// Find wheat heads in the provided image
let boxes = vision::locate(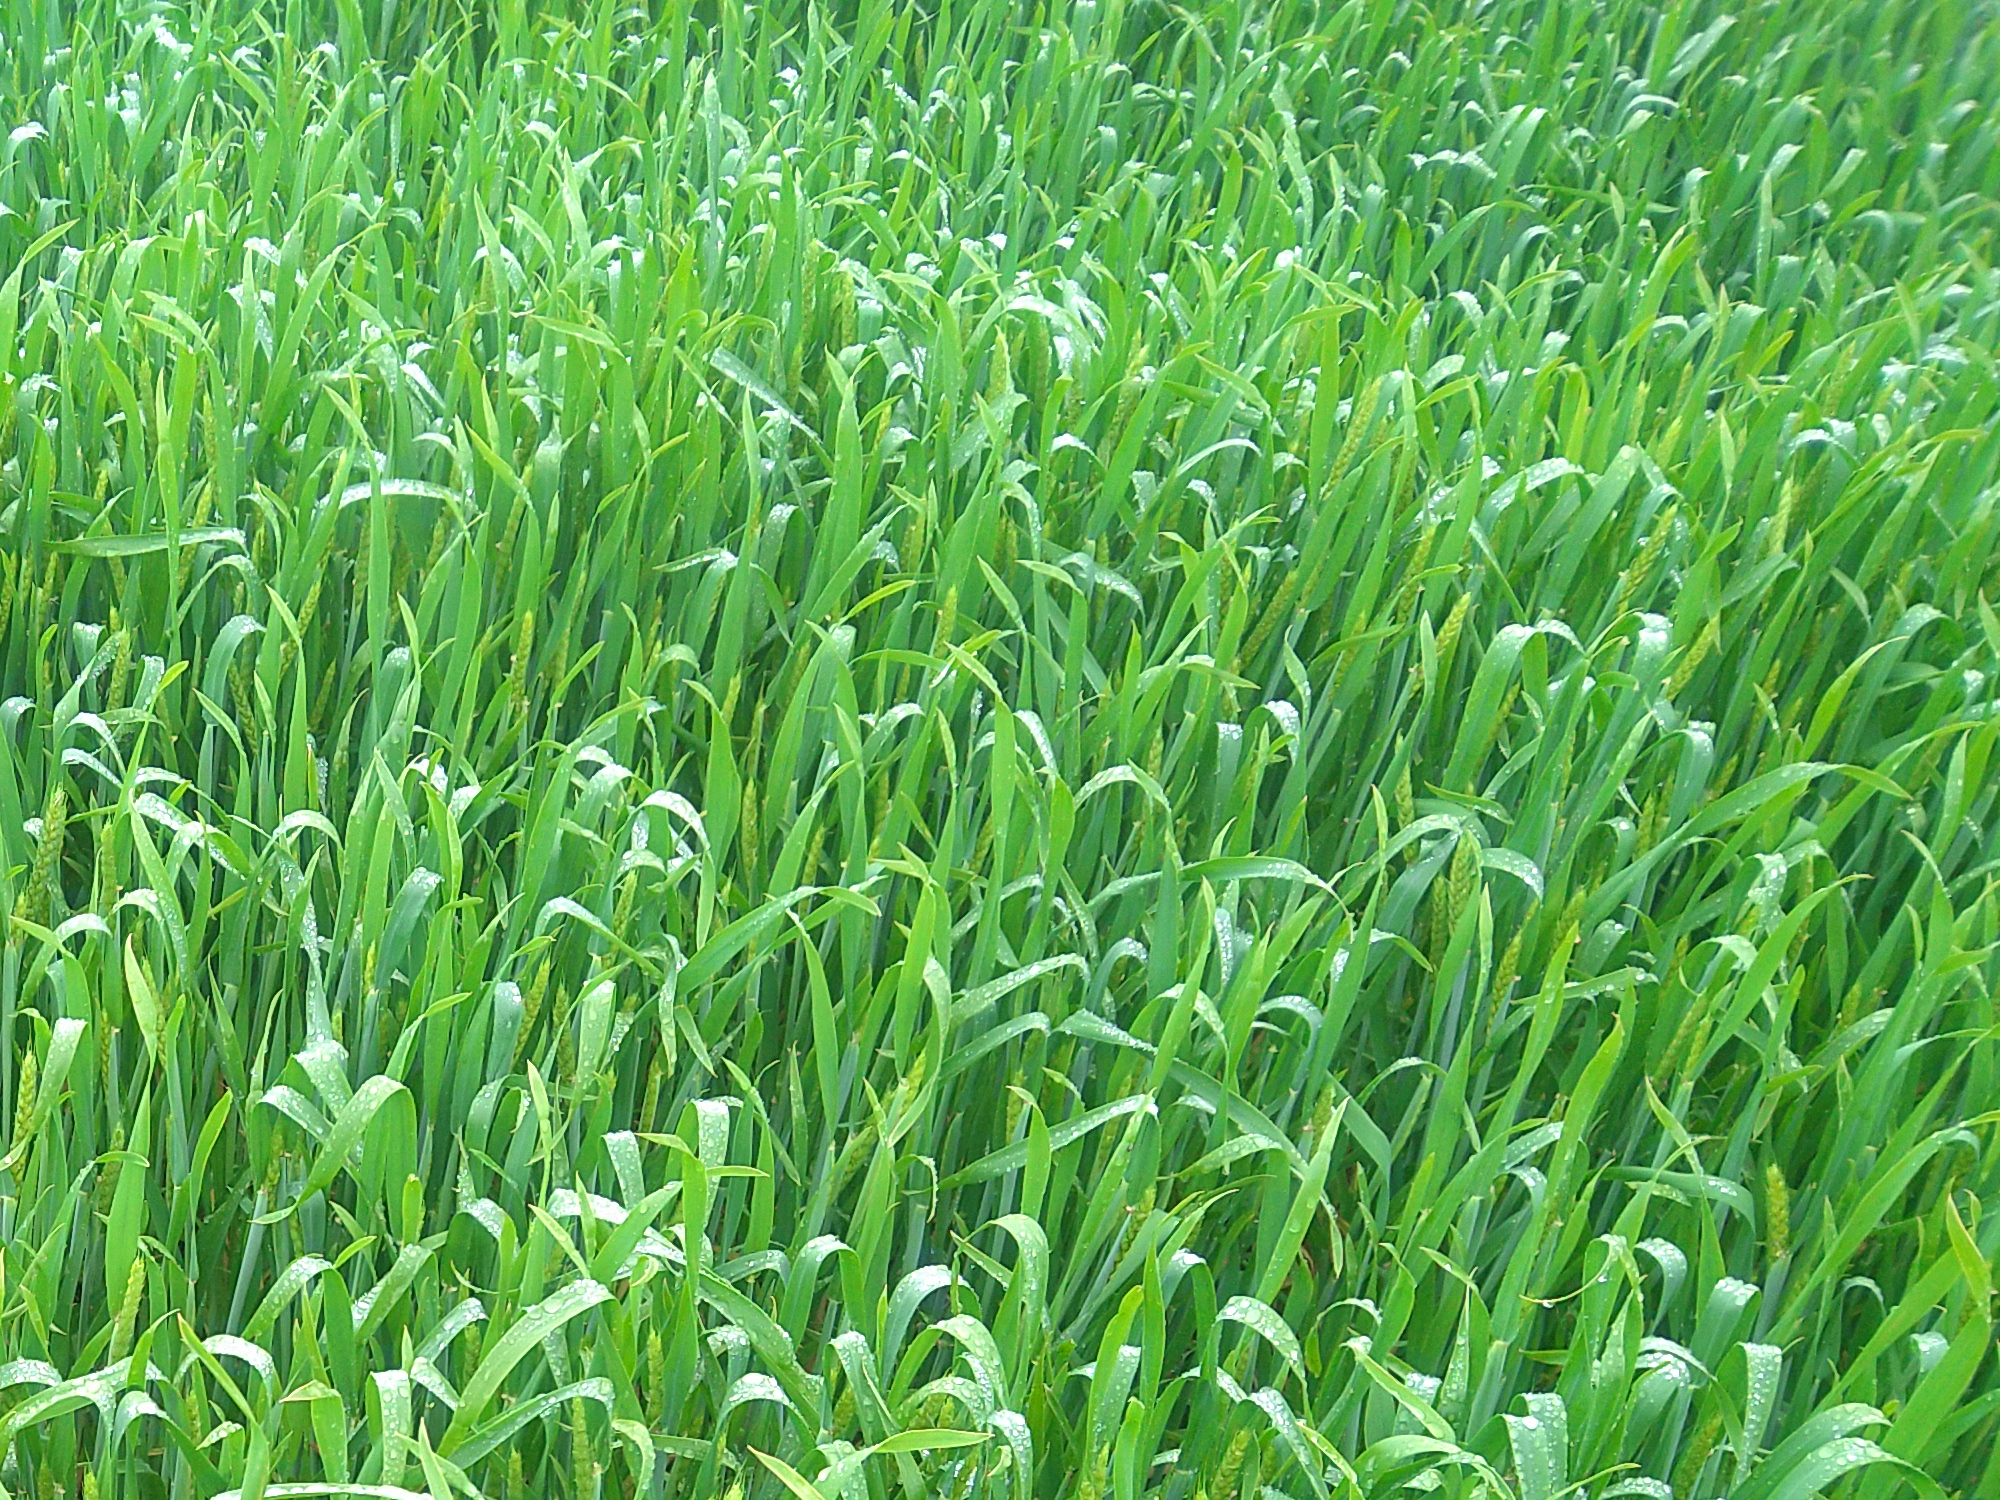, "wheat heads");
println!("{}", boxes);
[202,392,218,489]
[1027,312,1046,390]
[282,585,320,665]
[747,706,766,772]
[100,1011,114,1086]
[780,586,790,604]
[844,273,856,349]
[1227,111,1234,128]
[778,641,810,724]
[675,1410,702,1482]
[1764,1165,1789,1256]
[1346,677,1375,755]
[109,1254,146,1362]
[1098,1071,1133,1171]
[310,658,334,730]
[1712,753,1737,799]
[1449,831,1471,936]
[1671,1413,1724,1500]
[546,1241,565,1286]
[0,405,17,457]
[1736,428,1748,456]
[1653,772,1673,838]
[280,468,293,519]
[395,999,407,1021]
[334,1010,342,1040]
[807,114,823,156]
[92,1121,120,1209]
[1822,346,1852,415]
[227,660,257,747]
[1313,1079,1335,1157]
[46,452,58,491]
[1619,503,1678,601]
[19,550,33,603]
[9,1045,36,1172]
[1397,527,1432,622]
[1590,873,1602,896]
[507,961,548,1051]
[1770,478,1792,553]
[1174,415,1185,445]
[112,171,120,205]
[1521,895,1538,930]
[1784,916,1808,963]
[145,82,151,99]
[555,984,575,1078]
[387,555,413,621]
[1006,1073,1024,1131]
[806,1083,818,1117]
[38,1454,54,1500]
[937,77,952,138]
[1680,1018,1711,1082]
[1199,195,1211,222]
[671,659,679,691]
[176,484,217,593]
[1829,712,1855,763]
[102,521,126,597]
[715,1482,742,1500]
[1491,933,1520,1021]
[935,587,961,658]
[1548,890,1586,956]
[264,1130,285,1203]
[1715,83,1728,111]
[645,1329,667,1418]
[871,404,893,452]
[1748,659,1779,743]
[1586,515,1613,560]
[1034,332,1051,409]
[138,360,159,456]
[1189,180,1200,219]
[1320,587,1332,634]
[13,58,22,95]
[1812,612,1824,654]
[1668,617,1717,698]
[801,238,818,309]
[481,258,494,305]
[307,235,319,271]
[560,37,581,88]
[1872,380,1896,413]
[377,1014,387,1073]
[29,788,60,926]
[519,414,536,463]
[1406,593,1470,698]
[823,1092,894,1204]
[1397,444,1419,519]
[1116,1184,1152,1267]
[644,640,662,677]
[1782,1272,1807,1318]
[0,547,17,640]
[186,1389,203,1444]
[1658,418,1685,466]
[1425,878,1448,988]
[1567,576,1589,609]
[787,341,804,397]
[103,825,117,924]
[288,1202,303,1253]
[1910,729,1953,791]
[1006,526,1020,577]
[718,673,739,719]
[915,41,924,80]
[1208,1427,1251,1500]
[1230,1339,1252,1383]
[1651,989,1707,1084]
[1426,170,1443,207]
[1369,418,1387,451]
[1615,467,1648,539]
[1470,681,1520,781]
[1791,455,1828,524]
[1214,541,1239,643]
[833,1380,862,1439]
[365,938,381,990]
[1241,570,1298,666]
[9,895,28,949]
[1067,354,1084,426]
[41,657,51,700]
[39,548,57,630]
[899,1052,925,1117]
[508,1445,525,1500]
[1040,1050,1064,1108]
[651,596,663,617]
[1887,565,1914,620]
[586,301,594,320]
[749,936,757,959]
[1756,698,1802,774]
[1531,1102,1565,1167]
[758,225,775,280]
[58,161,66,197]
[622,993,637,1016]
[1557,740,1574,803]
[425,516,449,572]
[1658,935,1687,993]
[252,486,268,528]
[390,115,398,164]
[1329,612,1367,697]
[1226,90,1253,155]
[714,1434,724,1475]
[449,457,461,489]
[570,570,586,618]
[1112,955,1130,984]
[640,1071,661,1150]
[895,663,910,698]
[1735,908,1761,937]
[354,497,376,604]
[1126,328,1142,365]
[899,525,915,572]
[969,812,996,873]
[1110,345,1148,434]
[641,621,657,655]
[440,189,447,262]
[798,825,824,917]
[108,605,120,634]
[554,618,571,688]
[1840,986,1862,1026]
[133,920,145,953]
[1385,460,1398,499]
[139,960,168,1058]
[1628,379,1650,443]
[105,152,111,190]
[1011,331,1024,369]
[130,322,144,360]
[319,524,335,572]
[940,1448,980,1500]
[234,583,245,611]
[1631,794,1655,862]
[742,777,757,873]
[18,95,24,122]
[1396,735,1417,858]
[992,519,1007,568]
[521,310,533,351]
[494,465,533,584]
[1325,379,1381,494]
[307,52,320,70]
[1149,726,1162,790]
[1944,1122,1988,1191]
[1460,532,1474,575]
[1097,1440,1109,1495]
[107,635,131,715]
[610,867,632,951]
[907,1384,943,1434]
[641,83,651,109]
[872,772,886,836]
[940,1398,957,1431]
[510,607,533,697]
[1759,585,1773,620]
[94,466,108,501]
[77,260,90,293]
[94,142,104,188]
[709,569,725,621]
[989,336,1006,406]
[1095,534,1111,617]
[570,1397,599,1500]
[1489,509,1508,555]
[29,201,35,226]
[195,321,223,394]
[1300,566,1319,606]
[661,183,671,263]
[283,32,295,112]
[1670,361,1694,420]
